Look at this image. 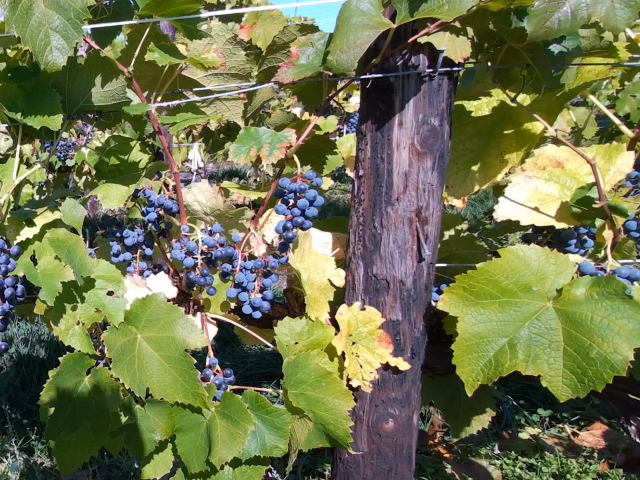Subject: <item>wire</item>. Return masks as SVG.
Segmentation results:
<instances>
[{
    "label": "wire",
    "instance_id": "obj_1",
    "mask_svg": "<svg viewBox=\"0 0 640 480\" xmlns=\"http://www.w3.org/2000/svg\"><path fill=\"white\" fill-rule=\"evenodd\" d=\"M337 0H314L309 2H296L285 4H272L266 6H249L248 8H231L217 11L203 12L199 14H188L182 16H168V17H148L144 19H133L126 21H114L112 23H95L92 25L82 24L81 28L86 30H94L98 28H114L117 26H129L135 24H147V23H159V22H171V21H184L190 19H201L205 17L220 16L234 13H251L252 11H269L275 9H288V8H309L316 5H328L336 3Z\"/></svg>",
    "mask_w": 640,
    "mask_h": 480
},
{
    "label": "wire",
    "instance_id": "obj_2",
    "mask_svg": "<svg viewBox=\"0 0 640 480\" xmlns=\"http://www.w3.org/2000/svg\"><path fill=\"white\" fill-rule=\"evenodd\" d=\"M237 86L247 87V88L233 90V91H230V92H217V93H212V94H209V95H197V96H191V97H187V98L172 99V100H169V101L164 102V103H153L152 107L153 108H166V107L172 106L174 104H183V103H189V102L200 101V100H212V99L219 98V97H232V96H236V95L247 94V93L254 92V91H257V90H260V89H264V88L274 87L275 83L274 82H267V83H262V84L256 85L255 82L235 81V82L222 83V84L197 85V86L185 87V88H181V89H166L165 93L166 94H183V93L199 91V90L224 89V88H232V87H237Z\"/></svg>",
    "mask_w": 640,
    "mask_h": 480
},
{
    "label": "wire",
    "instance_id": "obj_3",
    "mask_svg": "<svg viewBox=\"0 0 640 480\" xmlns=\"http://www.w3.org/2000/svg\"><path fill=\"white\" fill-rule=\"evenodd\" d=\"M434 70H435L434 66H425V67H419V68L410 69V70H397L389 73H377V74L364 73L359 75H347V76H341V77H312V78L301 79L300 83L307 84V83H314V82H343V81H349V80H361L366 78H374V79L391 78L399 75H412V74H418L421 72L434 71Z\"/></svg>",
    "mask_w": 640,
    "mask_h": 480
},
{
    "label": "wire",
    "instance_id": "obj_4",
    "mask_svg": "<svg viewBox=\"0 0 640 480\" xmlns=\"http://www.w3.org/2000/svg\"><path fill=\"white\" fill-rule=\"evenodd\" d=\"M640 64L639 60L635 61H612V60H592V61H574L569 62V67L577 66H595V65H610V66H637Z\"/></svg>",
    "mask_w": 640,
    "mask_h": 480
}]
</instances>
